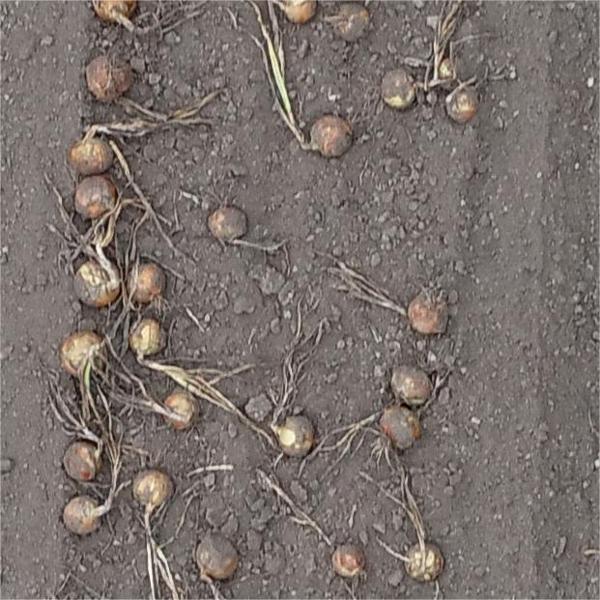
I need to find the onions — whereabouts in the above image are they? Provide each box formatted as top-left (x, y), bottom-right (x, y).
top-left (73, 177), bottom-right (116, 215)
top-left (130, 319), bottom-right (165, 355)
top-left (63, 442), bottom-right (100, 480)
top-left (277, 416), bottom-right (314, 458)
top-left (86, 55), bottom-right (130, 99)
top-left (392, 365), bottom-right (432, 404)
top-left (60, 330), bottom-right (106, 374)
top-left (124, 261), bottom-right (163, 303)
top-left (91, 0), bottom-right (134, 27)
top-left (73, 258), bottom-right (121, 306)
top-left (444, 89), bottom-right (478, 122)
top-left (280, 0), bottom-right (316, 23)
top-left (310, 114), bottom-right (352, 157)
top-left (62, 495), bottom-right (102, 534)
top-left (378, 406), bottom-right (419, 447)
top-left (208, 205), bottom-right (244, 241)
top-left (129, 470), bottom-right (172, 509)
top-left (195, 534), bottom-right (237, 577)
top-left (330, 543), bottom-right (363, 578)
top-left (330, 6), bottom-right (366, 42)
top-left (408, 294), bottom-right (448, 334)
top-left (379, 66), bottom-right (413, 108)
top-left (402, 543), bottom-right (442, 580)
top-left (70, 135), bottom-right (112, 175)
top-left (435, 59), bottom-right (462, 89)
top-left (162, 391), bottom-right (198, 428)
